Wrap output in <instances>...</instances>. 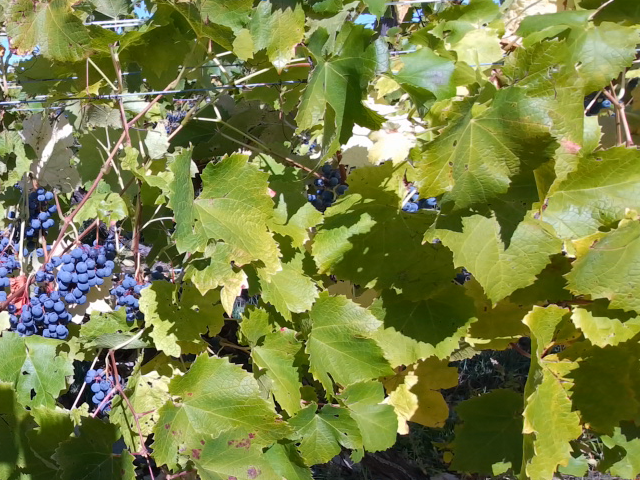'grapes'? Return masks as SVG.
Masks as SVG:
<instances>
[{
  "label": "grapes",
  "instance_id": "obj_1",
  "mask_svg": "<svg viewBox=\"0 0 640 480\" xmlns=\"http://www.w3.org/2000/svg\"><path fill=\"white\" fill-rule=\"evenodd\" d=\"M116 256L115 240L113 235H108L103 246L96 245L94 240L92 246L83 244L62 257H52L45 265V270L35 273L34 281L43 283L55 280L58 291L48 294L35 287L33 292L38 297L29 298L28 304L22 306L19 318L14 316L17 306L9 304L7 310L11 329L20 336L31 337L39 332L36 323L44 321L47 328L43 330L42 336L45 339H65L69 334L67 325L71 323L72 314L66 311V305L60 300V296L68 304L84 305L87 302L86 294L91 292L90 287L102 286L104 280L113 275L115 263L112 260Z\"/></svg>",
  "mask_w": 640,
  "mask_h": 480
},
{
  "label": "grapes",
  "instance_id": "obj_2",
  "mask_svg": "<svg viewBox=\"0 0 640 480\" xmlns=\"http://www.w3.org/2000/svg\"><path fill=\"white\" fill-rule=\"evenodd\" d=\"M53 199L54 194L52 192H46L44 188L37 189L29 196L28 204L32 216L29 218L30 226H27L24 229V236L28 240L27 247L22 249V255L26 258H31L33 256L30 249H34L36 247V243L32 239L33 237L37 238L39 236V232L37 230H46L55 225V220L50 218L52 214H56L58 212L55 204L49 205L45 212H38L37 209L39 202H41L43 206H46L48 202Z\"/></svg>",
  "mask_w": 640,
  "mask_h": 480
},
{
  "label": "grapes",
  "instance_id": "obj_3",
  "mask_svg": "<svg viewBox=\"0 0 640 480\" xmlns=\"http://www.w3.org/2000/svg\"><path fill=\"white\" fill-rule=\"evenodd\" d=\"M152 282H148L144 284H137L135 278L132 277L130 273H126L124 275V280L121 282V285H117L115 288L109 291L111 296L116 295V305L113 308V311H118L122 305H126V319L128 321H133L135 318L142 320L144 318V314L139 310H134L139 306L138 299L133 294H128L129 291H133L135 295L140 293V290L146 289L151 286Z\"/></svg>",
  "mask_w": 640,
  "mask_h": 480
},
{
  "label": "grapes",
  "instance_id": "obj_4",
  "mask_svg": "<svg viewBox=\"0 0 640 480\" xmlns=\"http://www.w3.org/2000/svg\"><path fill=\"white\" fill-rule=\"evenodd\" d=\"M83 383L90 386V392L95 393L92 396V403L95 405H101L99 414L105 416L106 412H110L112 405L111 401H106L102 404V401L112 390V383H114V375H110L106 381V372L103 368L88 369L83 378Z\"/></svg>",
  "mask_w": 640,
  "mask_h": 480
},
{
  "label": "grapes",
  "instance_id": "obj_5",
  "mask_svg": "<svg viewBox=\"0 0 640 480\" xmlns=\"http://www.w3.org/2000/svg\"><path fill=\"white\" fill-rule=\"evenodd\" d=\"M321 171L324 177L315 178L313 181V185L315 187H327L330 190H333L336 187V193L338 196H342L345 194V190L349 189L348 185H338L340 179L342 178V173L340 171L332 170V166L329 164H323L321 166Z\"/></svg>",
  "mask_w": 640,
  "mask_h": 480
},
{
  "label": "grapes",
  "instance_id": "obj_6",
  "mask_svg": "<svg viewBox=\"0 0 640 480\" xmlns=\"http://www.w3.org/2000/svg\"><path fill=\"white\" fill-rule=\"evenodd\" d=\"M21 263L14 259L13 253H3L0 263V287L9 288L11 286L8 274H12L14 270H18Z\"/></svg>",
  "mask_w": 640,
  "mask_h": 480
},
{
  "label": "grapes",
  "instance_id": "obj_7",
  "mask_svg": "<svg viewBox=\"0 0 640 480\" xmlns=\"http://www.w3.org/2000/svg\"><path fill=\"white\" fill-rule=\"evenodd\" d=\"M307 201L309 203L314 202V207L320 212L324 213L327 207L331 206L334 201V194L329 190L318 189L316 194H308Z\"/></svg>",
  "mask_w": 640,
  "mask_h": 480
},
{
  "label": "grapes",
  "instance_id": "obj_8",
  "mask_svg": "<svg viewBox=\"0 0 640 480\" xmlns=\"http://www.w3.org/2000/svg\"><path fill=\"white\" fill-rule=\"evenodd\" d=\"M419 198V194L418 193H414L412 196V201L413 202H407L403 205L402 207V211L403 212H409L410 214H415L419 211V209L421 208V205L425 202V207L432 209L433 206L437 205V198L436 197H430L427 198L426 200L424 198Z\"/></svg>",
  "mask_w": 640,
  "mask_h": 480
},
{
  "label": "grapes",
  "instance_id": "obj_9",
  "mask_svg": "<svg viewBox=\"0 0 640 480\" xmlns=\"http://www.w3.org/2000/svg\"><path fill=\"white\" fill-rule=\"evenodd\" d=\"M164 272V267L163 266H156L155 267V271L151 272V281H155V280H163L165 279L166 281H170L171 277L165 276V274H160Z\"/></svg>",
  "mask_w": 640,
  "mask_h": 480
}]
</instances>
